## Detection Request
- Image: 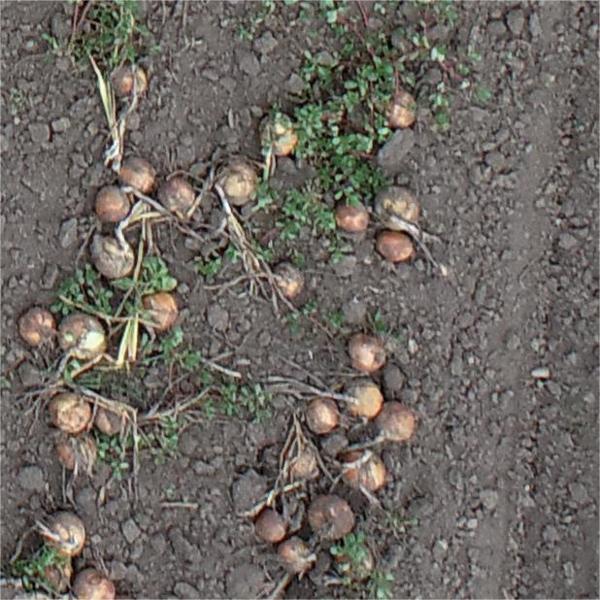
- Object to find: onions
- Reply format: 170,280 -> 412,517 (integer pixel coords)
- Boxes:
39,556 -> 74,589
55,437 -> 92,470
220,170 -> 255,204
376,184 -> 417,229
345,455 -> 387,492
159,173 -> 194,212
272,263 -> 305,301
343,381 -> 382,418
115,66 -> 146,99
347,332 -> 385,370
384,95 -> 416,128
72,568 -> 113,599
17,306 -> 56,346
287,453 -> 319,481
259,114 -> 298,153
93,186 -> 128,222
308,494 -> 353,535
48,393 -> 90,434
334,200 -> 367,233
253,508 -> 287,543
332,533 -> 374,575
276,536 -> 314,571
58,313 -> 107,357
39,510 -> 82,555
119,156 -> 155,193
92,234 -> 133,275
375,229 -> 412,263
141,291 -> 180,330
304,397 -> 338,433
94,405 -> 121,433
375,403 -> 413,441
